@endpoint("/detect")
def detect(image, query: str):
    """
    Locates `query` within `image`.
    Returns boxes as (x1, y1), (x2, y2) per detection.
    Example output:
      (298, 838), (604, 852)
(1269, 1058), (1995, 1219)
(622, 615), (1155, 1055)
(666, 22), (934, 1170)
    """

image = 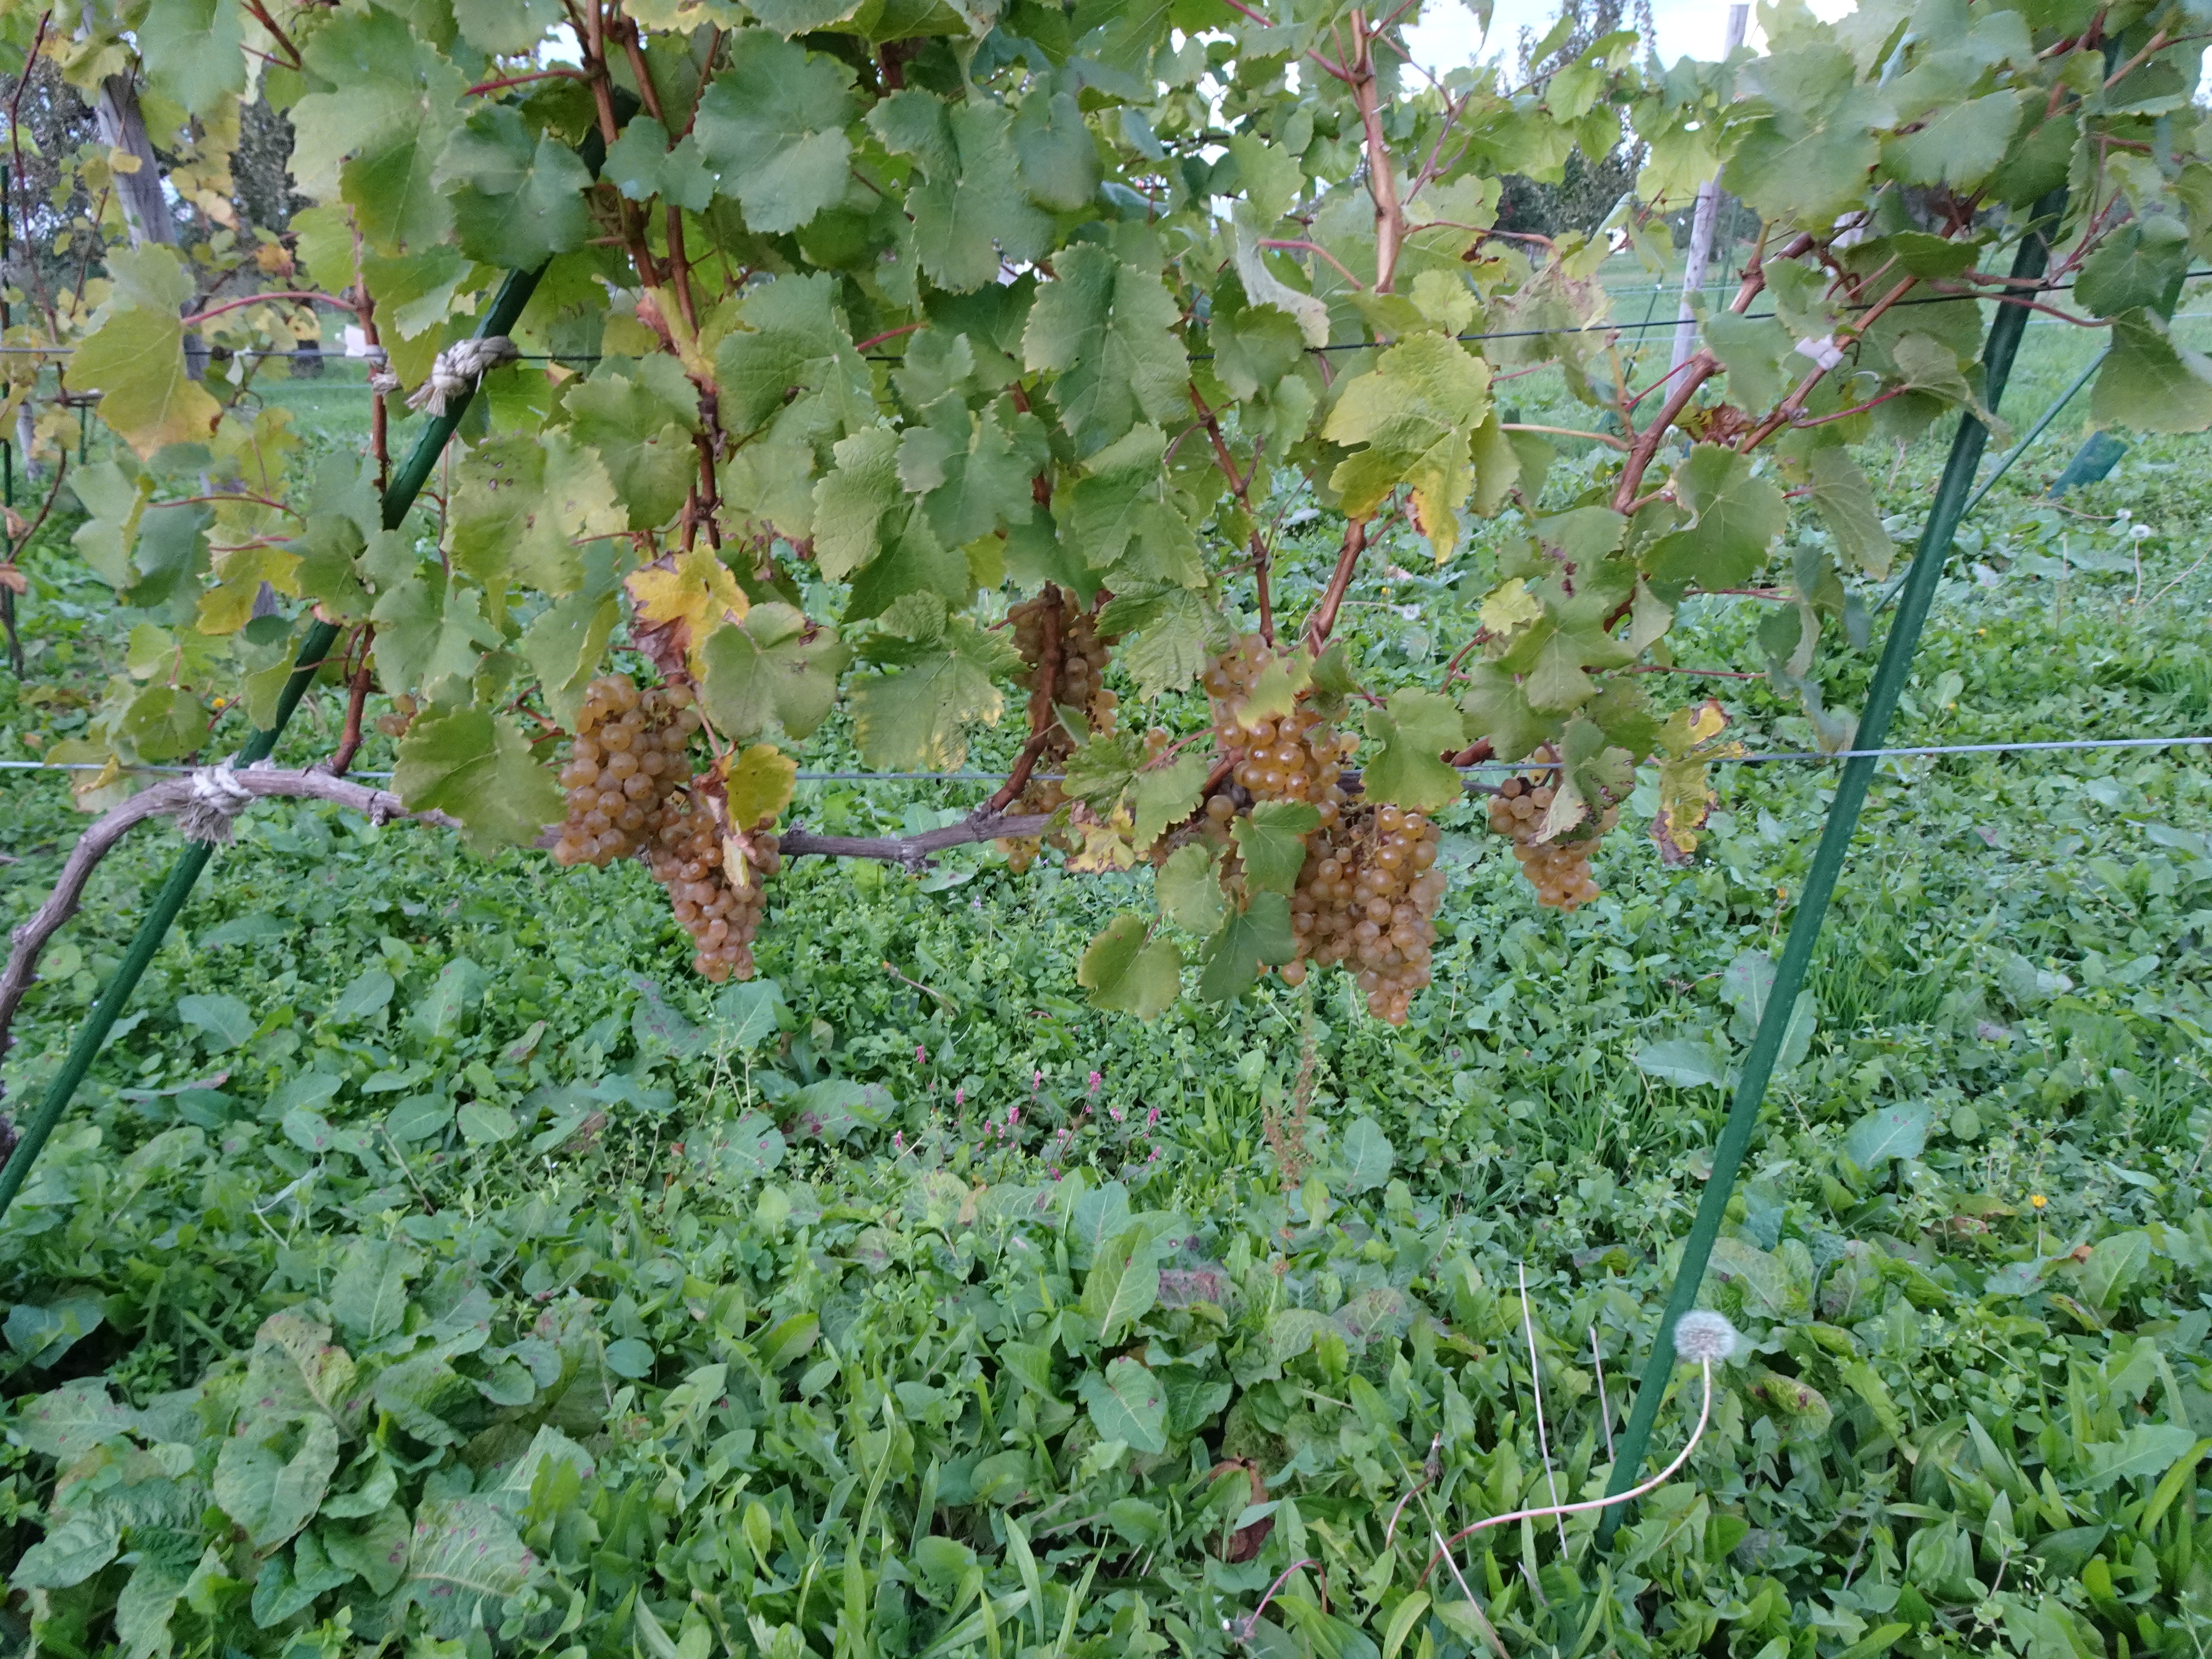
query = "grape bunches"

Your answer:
(1008, 584), (1112, 744)
(1196, 627), (1360, 823)
(646, 789), (782, 983)
(1485, 741), (1618, 911)
(1342, 802), (1447, 1026)
(553, 675), (699, 873)
(993, 744), (1070, 874)
(1143, 727), (1168, 760)
(1300, 813), (1373, 973)
(1095, 690), (1118, 740)
(1202, 794), (1322, 986)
